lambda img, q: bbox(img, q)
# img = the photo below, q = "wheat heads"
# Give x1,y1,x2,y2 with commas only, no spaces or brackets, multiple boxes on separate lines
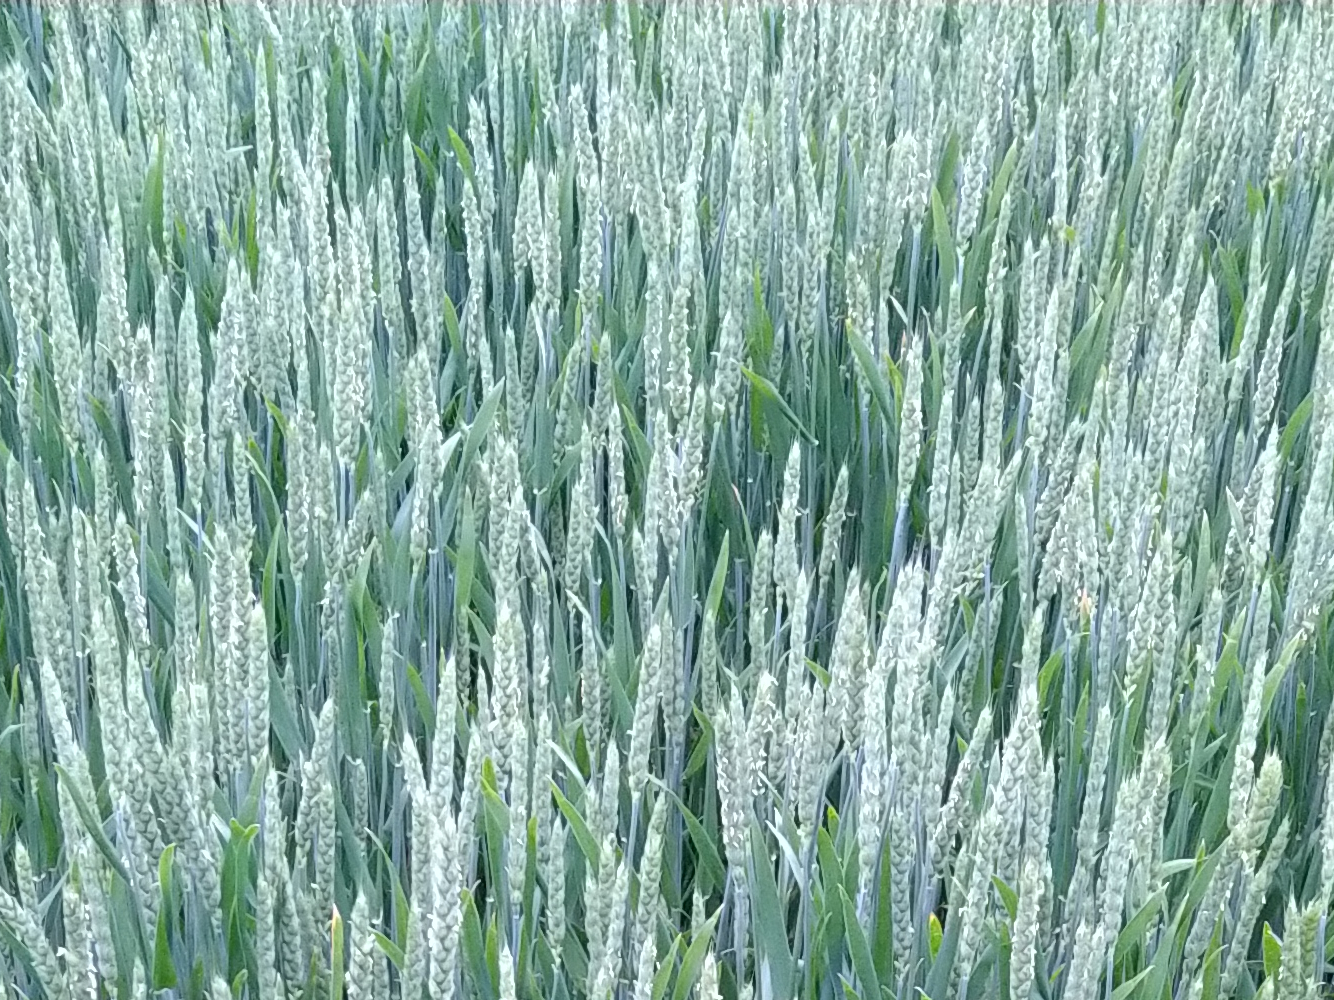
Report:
660,9,672,105
1101,30,1114,144
78,342,93,404
1301,199,1327,306
265,769,282,881
187,95,221,210
52,14,74,94
1313,0,1323,65
114,202,122,316
931,50,954,104
1253,425,1280,586
553,346,580,458
1314,521,1334,573
368,3,383,65
578,63,596,103
370,544,385,605
601,741,619,839
21,678,40,790
1169,450,1186,555
702,612,718,717
146,244,175,379
594,335,612,437
209,27,227,127
1145,624,1176,750
736,51,746,101
109,299,132,385
890,660,915,785
500,514,521,617
987,56,1001,133
327,632,340,704
1132,251,1144,319
1316,38,1334,128
511,439,518,508
916,66,933,137
580,1,593,59
657,415,679,557
1055,24,1066,79
76,64,92,140
315,946,334,1000
1036,504,1070,600
23,559,42,668
1262,819,1292,887
978,455,1023,587
879,296,890,376
926,102,949,177
363,186,375,245
96,5,108,56
1301,0,1309,78
129,324,153,389
156,62,166,123
1104,284,1135,408
982,316,1003,410
118,802,160,956
538,40,557,119
1102,782,1137,934
333,205,355,303
1211,92,1228,161
309,195,337,332
1032,425,1083,546
513,172,529,270
932,1,944,34
393,308,406,390
166,90,182,152
451,0,474,67
1129,384,1146,441
429,321,445,384
1078,483,1098,623
505,329,521,438
210,335,240,417
322,281,342,397
125,12,145,50
881,201,904,294
1318,645,1334,765
477,664,492,748
858,279,870,404
22,477,48,594
1077,708,1112,855
597,660,614,731
509,0,518,51
299,361,313,494
1112,89,1126,146
255,42,276,166
801,0,811,109
571,89,597,187
951,470,996,587
17,319,36,435
1070,45,1079,81
1031,237,1053,338
169,170,188,239
660,617,674,736
992,0,1012,63
1058,638,1079,775
1284,22,1299,70
239,160,253,227
373,449,390,546
957,0,974,41
1175,341,1203,470
1199,22,1209,79
1062,862,1084,941
212,6,228,66
1162,319,1183,380
452,484,470,546
618,60,639,103
883,0,903,67
662,114,676,199
162,135,171,247
1255,102,1264,139
294,701,335,855
1313,333,1333,445
918,0,936,69
605,865,628,984
782,200,795,319
615,0,636,73
116,146,137,243
615,184,627,276
1293,429,1334,575
1247,583,1272,675
1249,215,1264,300
628,629,661,789
603,98,618,214
687,6,703,69
584,876,604,998
1178,561,1194,657
635,795,668,955
249,609,269,763
372,941,392,1000
316,785,336,916
95,447,109,595
275,192,291,261
617,110,637,230
334,21,342,45
131,958,147,1000
401,0,425,49
632,531,652,633
456,609,470,701
643,113,671,254
898,350,923,498
208,261,240,422
1215,36,1233,78
1100,437,1114,552
1007,131,1036,196
462,179,482,287
767,713,788,784
1101,0,1116,74
819,467,849,572
1223,746,1252,827
851,195,865,256
709,132,723,245
1149,757,1169,876
818,0,839,104
751,533,770,613
547,819,567,955
780,512,798,575
798,132,823,232
1050,43,1058,106
206,530,230,779
671,630,687,745
545,176,561,306
1056,504,1078,603
380,621,394,737
1137,750,1160,865
126,78,144,187
49,340,82,439
582,619,601,756
1106,152,1121,196
890,149,916,217
291,9,301,58
1244,657,1263,757
1145,356,1171,483
316,442,337,583
504,52,514,160
691,886,703,936
6,65,61,145
1053,107,1070,227
628,938,658,1000
483,0,502,52
1037,876,1052,953
901,567,922,662
278,78,294,200
411,808,423,930
1002,0,1029,101
1146,90,1169,188
926,709,995,873
494,717,514,790
1078,374,1107,481
166,763,222,910
1129,27,1140,114
566,485,581,590
1121,0,1129,37
734,872,747,959
1288,599,1317,640
250,164,271,247
975,5,989,43
945,283,962,387
124,655,163,790
170,687,188,783
238,9,248,62
80,847,119,997
859,582,871,614
15,177,39,320
1310,521,1334,599
958,122,987,243
1018,237,1033,378
379,205,399,325
940,927,968,1000
15,842,39,922
205,88,230,213
184,284,201,393
354,759,369,857
488,443,507,568
801,219,819,338
1130,177,1153,248
578,423,596,555
705,0,725,88
190,685,213,808
925,534,957,646
10,223,27,323
114,516,151,658
93,609,129,812
1139,296,1172,377
160,55,174,98
233,434,254,553
1203,272,1218,381
175,577,192,680
229,548,250,767
711,308,736,417
788,685,815,801
300,12,317,67
728,345,740,400
1244,756,1284,855
623,266,633,332
523,509,545,591
1209,92,1251,193
492,612,515,728
1210,0,1222,56
1065,39,1097,116
165,6,184,70
314,7,329,38
676,182,694,293
356,311,377,418
965,397,980,492
986,382,1004,470
1071,0,1086,24
823,124,838,239
1274,901,1303,1000
824,566,858,689
726,103,751,207
1063,11,1085,48
179,6,205,69
457,732,484,878
786,572,810,723
404,739,436,828
1164,0,1174,17
715,712,742,870
1310,56,1334,163
1321,502,1334,541
1195,88,1219,152
208,415,227,519
144,27,160,73
1254,96,1289,185
643,451,664,561
599,34,611,153
698,956,722,1000
1163,142,1183,221
1096,606,1113,709
692,217,707,314
1099,212,1120,291
993,706,1037,822
825,593,858,754
1197,449,1214,519
10,98,25,197
334,302,358,458
467,100,495,211
860,12,883,138
1083,178,1096,262
387,73,396,133
1075,925,1107,1000
799,685,824,836
341,11,361,110
1196,364,1227,445
388,3,406,77
526,167,545,294
1069,94,1088,159
750,609,762,696
383,175,401,261
1028,150,1039,202
1053,234,1063,287
829,47,847,117
771,75,791,206
1175,142,1192,241
97,231,116,299
844,17,865,101
287,425,306,577
643,273,667,430
1011,875,1039,1000
1105,170,1123,229
1022,732,1049,873
406,354,417,440
405,182,429,330
780,72,796,151
229,9,243,84
912,654,926,785
273,255,291,364
964,49,983,154
1016,493,1029,598
1041,755,1056,841
736,399,747,458
35,236,52,320
63,126,81,227
535,715,553,873
165,449,182,572
730,679,747,766
684,110,710,186
1124,558,1162,688
1154,14,1168,89
863,677,887,770
293,151,311,197
698,55,733,145
900,52,915,138
430,807,463,1000
293,260,305,375
513,614,529,712
0,876,71,1000
1055,254,1083,347
957,33,977,126
1327,213,1334,334
868,141,890,260
1278,272,1294,317
848,256,862,332
534,624,548,712
737,133,750,276
1181,271,1203,346
876,568,910,670
130,52,156,137
758,411,767,454
56,778,81,867
416,347,443,492
848,9,867,136
256,877,276,1000
1176,1,1188,44
496,949,521,1000
402,910,424,1000
1240,0,1254,35
1261,29,1286,108
1231,430,1246,492
609,401,626,534
685,53,698,135
84,5,94,39
184,415,204,501
470,456,490,537
756,213,771,296
72,513,88,643
1322,336,1334,430
42,562,74,697
1224,72,1235,135
1032,103,1052,154
469,278,485,363
323,495,373,627
517,0,530,70
1043,350,1072,461
432,658,457,803
1197,177,1213,225
1092,177,1110,257
958,604,986,713
1084,75,1098,185
301,127,317,240
271,322,297,417
493,252,504,318
481,335,494,406
41,661,78,778
5,453,21,551
982,593,1000,654
1078,541,1083,560
903,0,921,65
1221,454,1265,595
507,725,528,901
1020,607,1044,710
153,1,170,49
570,26,582,84
347,99,360,202
666,289,690,415
1178,288,1212,385
1300,904,1322,984
404,42,416,100
258,230,272,306
1319,732,1334,907
18,97,40,165
1318,219,1334,326
928,687,955,814
1030,0,1050,93
187,126,205,227
1262,0,1271,48
782,0,799,75
1182,833,1241,974
983,194,1015,318
129,390,145,510
913,127,930,231
1183,0,1194,58
300,74,311,145
870,64,899,162
761,328,784,435
1146,221,1163,305
842,617,865,749
278,6,298,98
152,283,168,411
347,897,371,1000
352,212,374,303
750,83,766,217
1182,437,1204,530
772,444,801,586
522,307,537,400
446,44,459,98
995,801,1021,917
1114,38,1136,86
224,105,242,187
857,753,885,890
280,868,305,1000
1302,30,1334,123
1091,845,1111,906
95,291,110,400
1252,42,1266,99
314,66,328,180
632,123,657,257
1068,197,1084,245
545,0,558,81
728,9,740,66
1182,81,1204,143
485,34,503,124
575,177,601,319
1235,54,1242,106
891,813,914,977
43,240,83,356
599,834,617,944
177,311,191,417
1107,458,1142,600
243,274,261,383
681,386,706,504
276,292,291,363
1136,25,1152,119
1145,0,1156,21
746,0,762,77
1028,295,1058,444
171,151,200,229
101,60,109,93
746,677,775,787
1253,305,1286,432
1111,376,1131,489
436,177,446,307
1174,210,1199,307
1190,595,1225,723
195,3,212,55
929,393,954,541
794,95,807,143
551,490,561,569
1150,534,1177,686
81,416,96,475
1053,928,1092,1000
99,92,122,211
67,109,90,202
641,27,657,96
721,216,735,312
1270,72,1305,183
828,231,846,317
1202,0,1212,27
587,775,600,857
1219,871,1267,995
1133,0,1142,26
63,892,99,1000
1207,563,1219,617
202,169,226,227
409,462,428,563
664,55,687,182
1234,283,1269,384
962,824,996,962
403,133,419,191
